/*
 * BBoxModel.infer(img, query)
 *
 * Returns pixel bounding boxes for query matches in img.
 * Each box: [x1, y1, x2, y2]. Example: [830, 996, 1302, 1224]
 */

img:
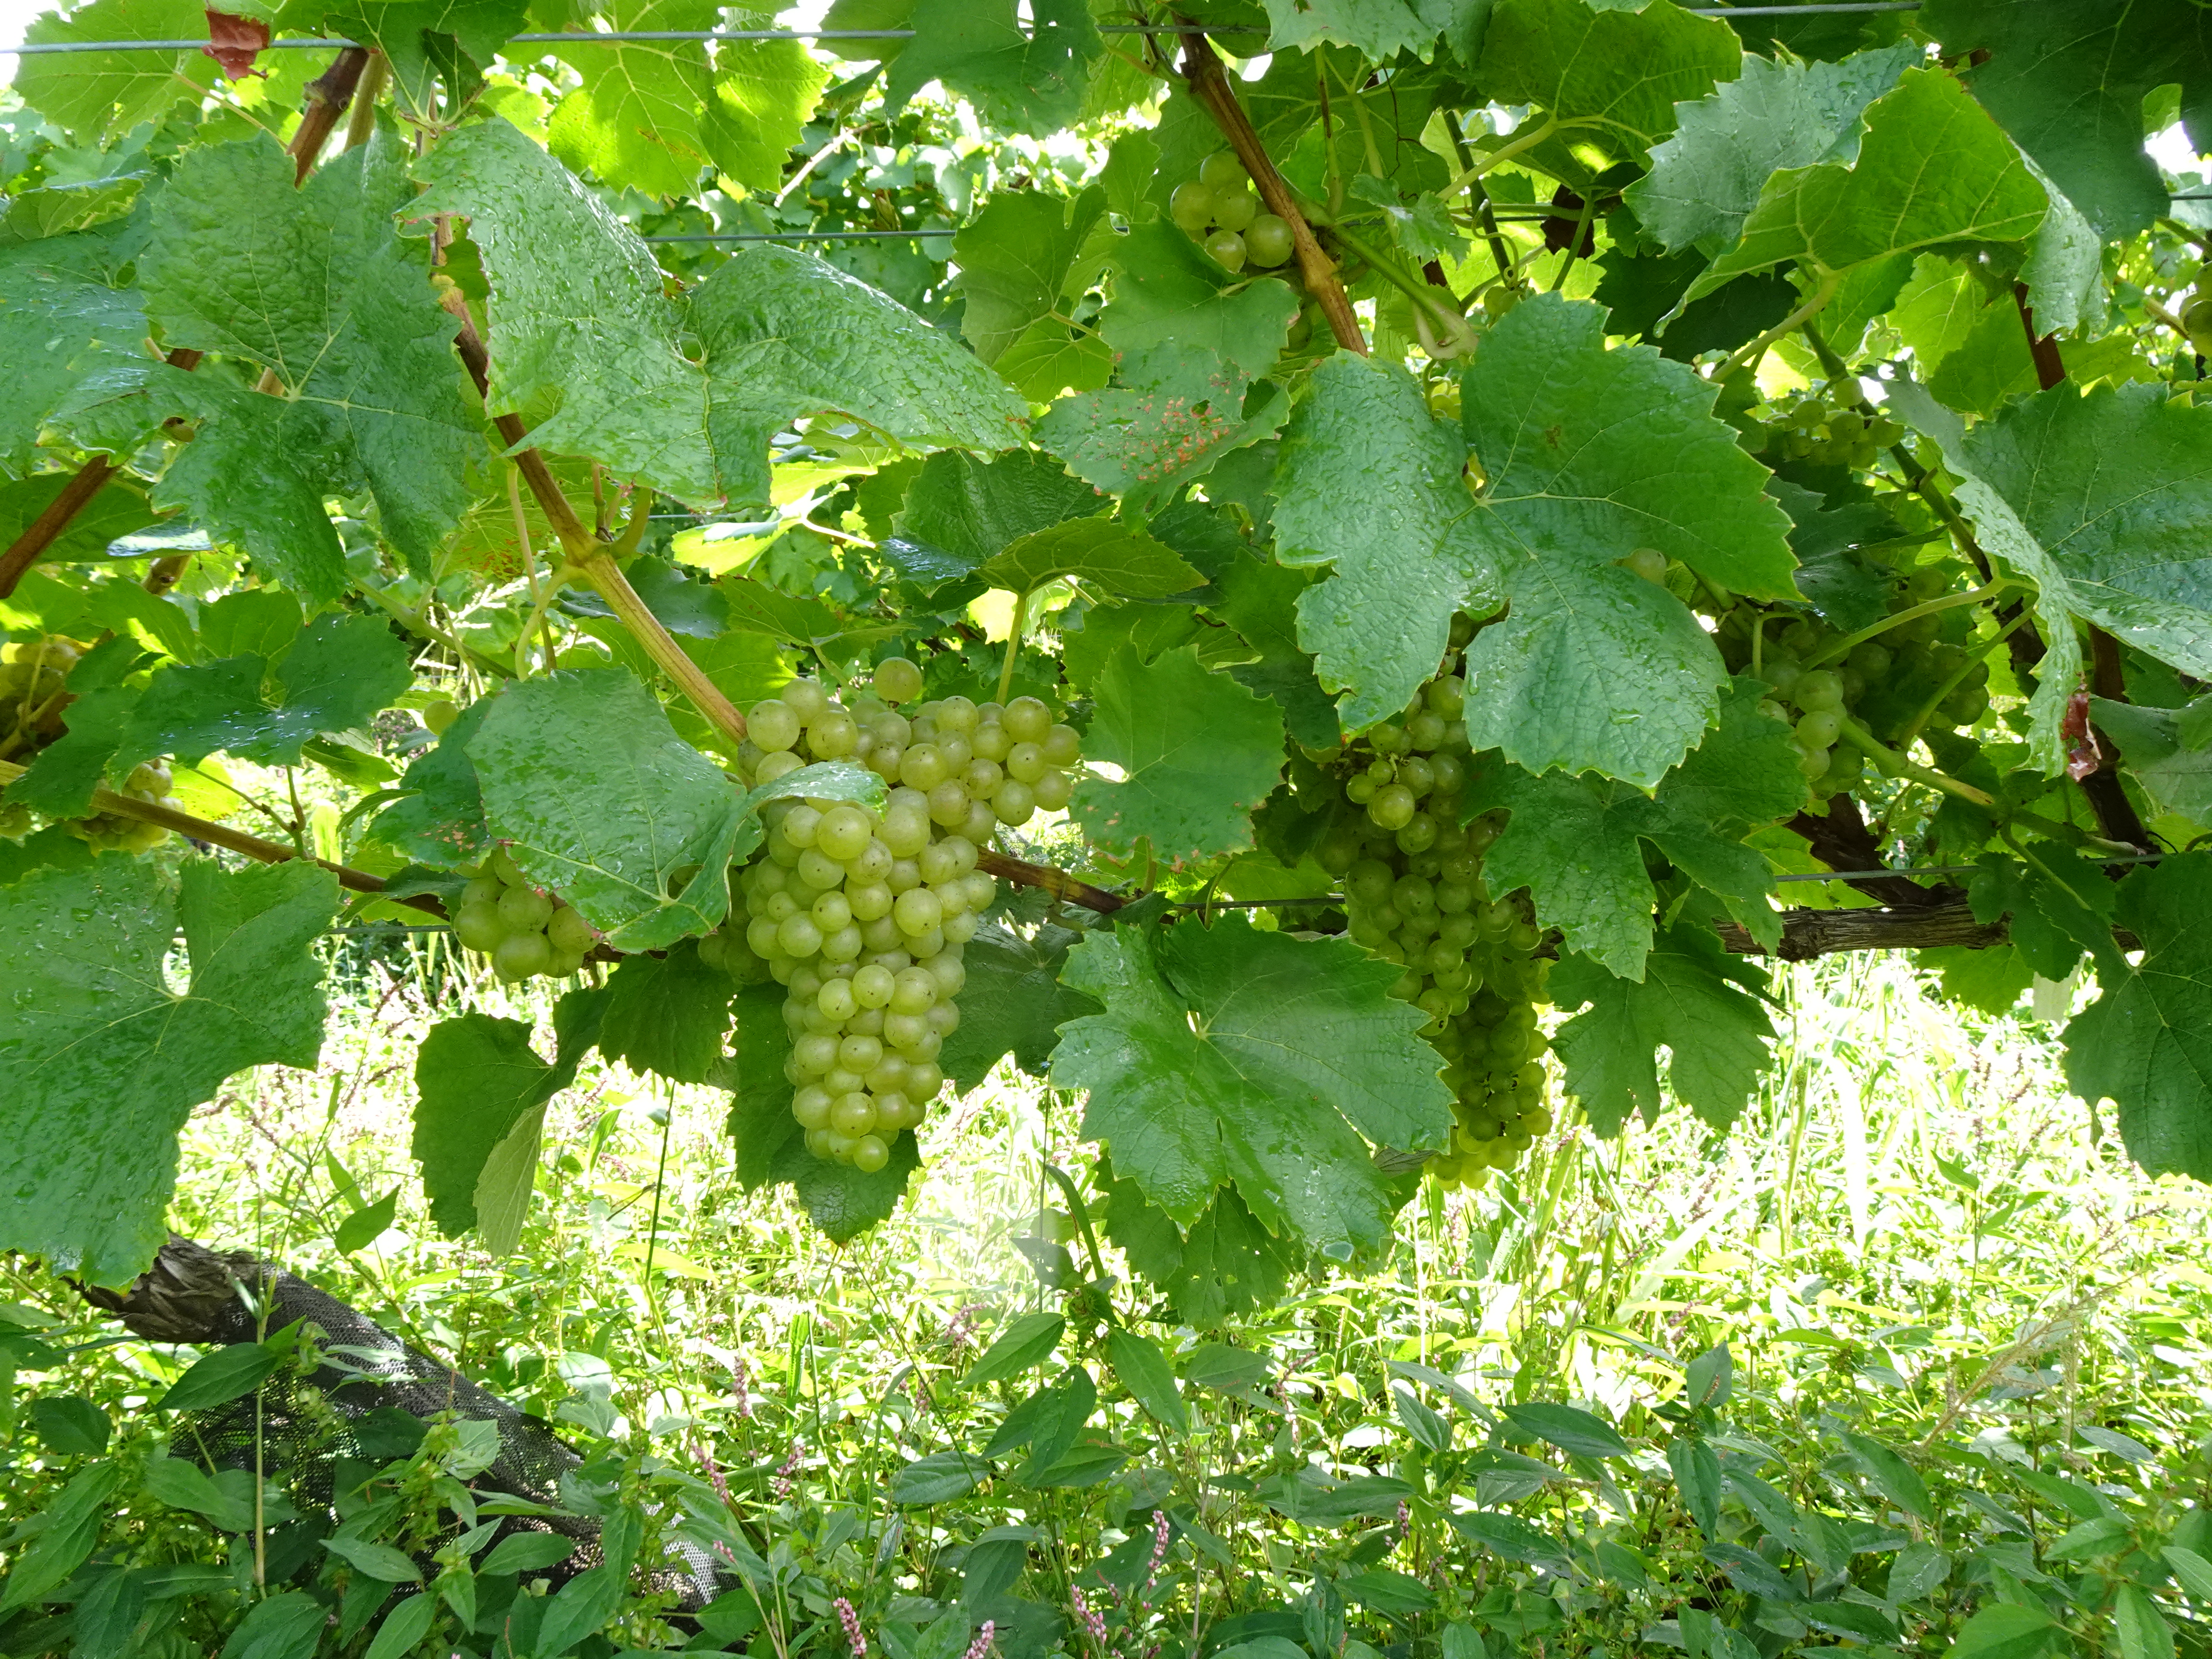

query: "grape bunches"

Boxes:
[733, 656, 921, 785]
[1345, 647, 1543, 949]
[0, 641, 77, 701]
[1170, 150, 1318, 350]
[0, 751, 37, 838]
[1625, 546, 1666, 587]
[453, 844, 603, 982]
[1314, 812, 1478, 1035]
[899, 696, 1083, 845]
[1737, 617, 1892, 801]
[1878, 569, 1988, 724]
[1766, 377, 1904, 468]
[1417, 991, 1553, 1192]
[2179, 262, 2212, 363]
[62, 757, 183, 854]
[741, 758, 997, 1172]
[673, 771, 772, 984]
